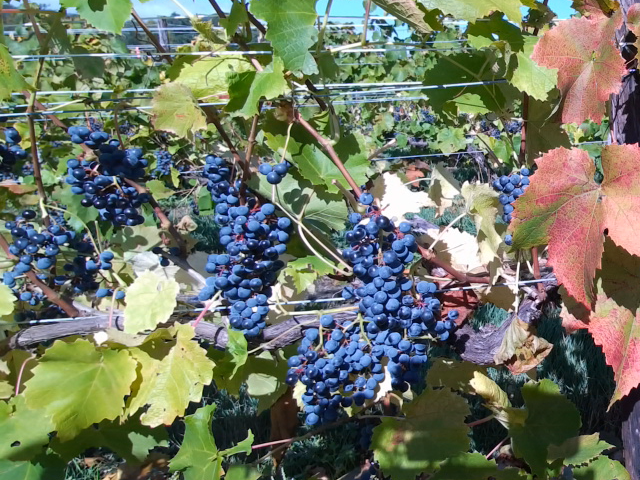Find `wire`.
Wrapping results in <instances>:
<instances>
[{
  "label": "wire",
  "mask_w": 640,
  "mask_h": 480,
  "mask_svg": "<svg viewBox=\"0 0 640 480\" xmlns=\"http://www.w3.org/2000/svg\"><path fill=\"white\" fill-rule=\"evenodd\" d=\"M509 79H491L478 82H463V83H451V84H437L434 86H414L424 85V80H410V79H397L384 82H325L315 83V88L325 89L326 87H386L400 84L403 85L395 89H376V90H344V91H326L317 92L315 94H296V99H317L328 96H346V95H378L387 94L388 92H399L404 90H425V89H440L446 87H469L482 84H509Z\"/></svg>",
  "instance_id": "d2f4af69"
},
{
  "label": "wire",
  "mask_w": 640,
  "mask_h": 480,
  "mask_svg": "<svg viewBox=\"0 0 640 480\" xmlns=\"http://www.w3.org/2000/svg\"><path fill=\"white\" fill-rule=\"evenodd\" d=\"M270 50L260 51H204L191 52L172 50L168 52H108V53H86V54H13V59H88V58H110V57H157L166 58L170 56H262L270 55Z\"/></svg>",
  "instance_id": "a73af890"
},
{
  "label": "wire",
  "mask_w": 640,
  "mask_h": 480,
  "mask_svg": "<svg viewBox=\"0 0 640 480\" xmlns=\"http://www.w3.org/2000/svg\"><path fill=\"white\" fill-rule=\"evenodd\" d=\"M477 51L476 47L472 48H341V49H310V54H343V53H474Z\"/></svg>",
  "instance_id": "4f2155b8"
},
{
  "label": "wire",
  "mask_w": 640,
  "mask_h": 480,
  "mask_svg": "<svg viewBox=\"0 0 640 480\" xmlns=\"http://www.w3.org/2000/svg\"><path fill=\"white\" fill-rule=\"evenodd\" d=\"M151 104H136L132 106H123L119 108L114 107H97V108H79V109H66V110H58V111H42V112H21V111H11V112H0V117H44V116H60V115H68V114H82V113H99V112H112V113H122L126 111H134L138 109H151Z\"/></svg>",
  "instance_id": "f0478fcc"
},
{
  "label": "wire",
  "mask_w": 640,
  "mask_h": 480,
  "mask_svg": "<svg viewBox=\"0 0 640 480\" xmlns=\"http://www.w3.org/2000/svg\"><path fill=\"white\" fill-rule=\"evenodd\" d=\"M556 278H538L534 280H520V281H512V282H502L496 284H481L476 286H466V287H440L436 289L437 293L442 292H468V291H478L483 289H498L504 287H514V286H522V285H536V284H546V283H556Z\"/></svg>",
  "instance_id": "a009ed1b"
},
{
  "label": "wire",
  "mask_w": 640,
  "mask_h": 480,
  "mask_svg": "<svg viewBox=\"0 0 640 480\" xmlns=\"http://www.w3.org/2000/svg\"><path fill=\"white\" fill-rule=\"evenodd\" d=\"M111 318L110 314L105 315H76V316H66L59 318H42L39 320H26V319H5L1 320V325L7 324H24V325H41L45 323H61L63 321L70 320H81V319H89V320H104Z\"/></svg>",
  "instance_id": "34cfc8c6"
},
{
  "label": "wire",
  "mask_w": 640,
  "mask_h": 480,
  "mask_svg": "<svg viewBox=\"0 0 640 480\" xmlns=\"http://www.w3.org/2000/svg\"><path fill=\"white\" fill-rule=\"evenodd\" d=\"M345 298L344 297H334V298H316V299H309V300H280V299H274V300H269L267 302L268 306L271 305H311V304H318V303H336V302H344Z\"/></svg>",
  "instance_id": "f1345edc"
},
{
  "label": "wire",
  "mask_w": 640,
  "mask_h": 480,
  "mask_svg": "<svg viewBox=\"0 0 640 480\" xmlns=\"http://www.w3.org/2000/svg\"><path fill=\"white\" fill-rule=\"evenodd\" d=\"M113 89H96V90H79V89H70V90H39V95H56V96H64V95H99V94H113Z\"/></svg>",
  "instance_id": "7f2ff007"
}]
</instances>
